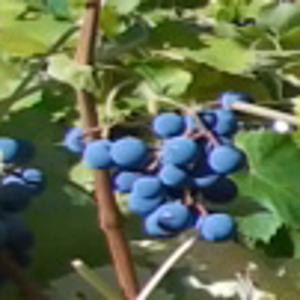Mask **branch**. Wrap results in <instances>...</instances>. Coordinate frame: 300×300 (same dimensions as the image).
<instances>
[{
    "instance_id": "obj_3",
    "label": "branch",
    "mask_w": 300,
    "mask_h": 300,
    "mask_svg": "<svg viewBox=\"0 0 300 300\" xmlns=\"http://www.w3.org/2000/svg\"><path fill=\"white\" fill-rule=\"evenodd\" d=\"M82 114L81 128L85 136L90 140H98L103 135V130L97 119V109L91 92L81 89L76 94Z\"/></svg>"
},
{
    "instance_id": "obj_2",
    "label": "branch",
    "mask_w": 300,
    "mask_h": 300,
    "mask_svg": "<svg viewBox=\"0 0 300 300\" xmlns=\"http://www.w3.org/2000/svg\"><path fill=\"white\" fill-rule=\"evenodd\" d=\"M102 9L101 0H88L80 30L79 41L73 53L74 60L79 64L91 66L96 61L95 31Z\"/></svg>"
},
{
    "instance_id": "obj_1",
    "label": "branch",
    "mask_w": 300,
    "mask_h": 300,
    "mask_svg": "<svg viewBox=\"0 0 300 300\" xmlns=\"http://www.w3.org/2000/svg\"><path fill=\"white\" fill-rule=\"evenodd\" d=\"M110 173L99 168L94 173L97 190L96 216L103 231L107 252L110 257L117 284L123 300H139L141 282L131 261L123 224V211L117 206L110 183Z\"/></svg>"
}]
</instances>
